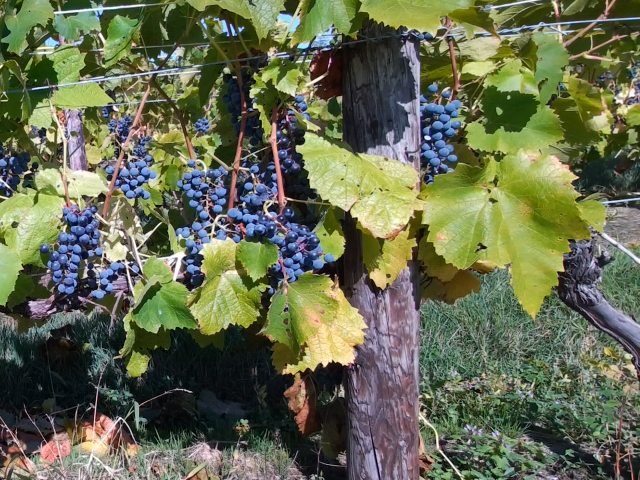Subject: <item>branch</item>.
<instances>
[{
    "label": "branch",
    "instance_id": "1ff4a987",
    "mask_svg": "<svg viewBox=\"0 0 640 480\" xmlns=\"http://www.w3.org/2000/svg\"><path fill=\"white\" fill-rule=\"evenodd\" d=\"M223 18H224V22H225L226 32H227V35L229 37V41H230V44H231V50H232V53H233V58L234 57H238V51H237V48H236V42H235V39H234L233 32L231 30V25H230V20H229V15H228V11L227 10L223 11Z\"/></svg>",
    "mask_w": 640,
    "mask_h": 480
},
{
    "label": "branch",
    "instance_id": "ca6c30ca",
    "mask_svg": "<svg viewBox=\"0 0 640 480\" xmlns=\"http://www.w3.org/2000/svg\"><path fill=\"white\" fill-rule=\"evenodd\" d=\"M121 65H122V66H127V67H129V68H131V69L135 70L137 73H141V72H142V69H141L139 66H137V65L133 64L132 62H129V61H122V62H121Z\"/></svg>",
    "mask_w": 640,
    "mask_h": 480
},
{
    "label": "branch",
    "instance_id": "325d2c04",
    "mask_svg": "<svg viewBox=\"0 0 640 480\" xmlns=\"http://www.w3.org/2000/svg\"><path fill=\"white\" fill-rule=\"evenodd\" d=\"M234 67L236 70V75H237V87H238V95L240 98V105H241V109H242V115L240 118V129H239V133H238V145H237V154L234 158V166H233V170H232V175H231V189H230V193L228 196V208L232 209L235 206V191H236V177H237V172H238V168H239V161L241 159L242 156V148H243V136H244V132H245V121L247 118V107H246V102H245V96H244V92H243V85H242V72H241V68L239 63H234Z\"/></svg>",
    "mask_w": 640,
    "mask_h": 480
},
{
    "label": "branch",
    "instance_id": "982ccf7c",
    "mask_svg": "<svg viewBox=\"0 0 640 480\" xmlns=\"http://www.w3.org/2000/svg\"><path fill=\"white\" fill-rule=\"evenodd\" d=\"M447 45H448L450 61H451L453 85H454V88H455V90L453 92V97L457 98L459 93H460V85L458 83V73H457L456 59H455V52H454V48H453L452 38H447Z\"/></svg>",
    "mask_w": 640,
    "mask_h": 480
},
{
    "label": "branch",
    "instance_id": "170604dd",
    "mask_svg": "<svg viewBox=\"0 0 640 480\" xmlns=\"http://www.w3.org/2000/svg\"><path fill=\"white\" fill-rule=\"evenodd\" d=\"M279 102H280V99L276 98L272 106V120L270 125V132H269V144L271 145L272 153L274 154L276 177L278 180V190H279L278 213L282 214L284 210V206L286 205V202H287V198L284 197V187H283L284 180L281 175L279 152L276 146V138H277L276 122H277V108H278Z\"/></svg>",
    "mask_w": 640,
    "mask_h": 480
},
{
    "label": "branch",
    "instance_id": "45aa463d",
    "mask_svg": "<svg viewBox=\"0 0 640 480\" xmlns=\"http://www.w3.org/2000/svg\"><path fill=\"white\" fill-rule=\"evenodd\" d=\"M49 107L51 109L52 116H53V118L55 120V123L57 124V127L59 129V132H60L63 144H64V146H63L64 162H63V166H62V182H63V186H64V191L66 193L67 206H71L70 199H69V191H68L67 183H66V179H65V169H66V165H67V150H66L67 142H66L62 127L60 125V122L58 120V117H57V115H56V113L54 111L53 104L49 103Z\"/></svg>",
    "mask_w": 640,
    "mask_h": 480
},
{
    "label": "branch",
    "instance_id": "ea751061",
    "mask_svg": "<svg viewBox=\"0 0 640 480\" xmlns=\"http://www.w3.org/2000/svg\"><path fill=\"white\" fill-rule=\"evenodd\" d=\"M183 43L182 39H179L174 46L167 52V54L165 55V57H163L160 61V63L157 65V68H163L166 64V62L170 59V57L172 56V54L181 46V44Z\"/></svg>",
    "mask_w": 640,
    "mask_h": 480
},
{
    "label": "branch",
    "instance_id": "30e6481e",
    "mask_svg": "<svg viewBox=\"0 0 640 480\" xmlns=\"http://www.w3.org/2000/svg\"><path fill=\"white\" fill-rule=\"evenodd\" d=\"M157 78H158V74H153L149 85L147 86V88L145 89L144 93L141 96L140 102H139V106H138V110L135 114V117L132 121V124L129 128V132L125 138V143H124V148L122 150V152L119 154V158L116 160L115 163V167L112 173V179L111 182L109 183L108 189H107V194L105 196V201H104V205L102 208V215L101 218L102 219H106L107 218V210L109 208V203H110V199L112 197V192L114 189V186L116 184L117 181V175L119 173L120 170V166H121V162L124 159V157L127 155L128 150H129V145H130V141L133 137L135 128L137 126V123L140 119V116L142 115L143 109H144V105L147 99V96L150 94L152 88L154 87L159 96L166 101L167 104H169V106L172 108L173 112L177 115L178 117V121L181 127V131H182V135L185 141V145H186V152L189 156L190 159H194L195 155L191 149V143H190V138L186 129V125H185V121L183 118L182 113L180 112V110L178 109V107L176 106V104L163 92L162 87L157 83Z\"/></svg>",
    "mask_w": 640,
    "mask_h": 480
}]
</instances>
